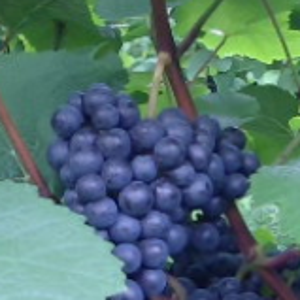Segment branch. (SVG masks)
Masks as SVG:
<instances>
[{"label":"branch","instance_id":"30e6481e","mask_svg":"<svg viewBox=\"0 0 300 300\" xmlns=\"http://www.w3.org/2000/svg\"><path fill=\"white\" fill-rule=\"evenodd\" d=\"M223 2L224 0H214L206 7L202 15L198 17L197 22L194 23L185 34L183 40L176 44L167 16L166 0H148L149 20L155 37V43L157 44V53L165 51L169 54V61L165 65V71L172 86L177 107L187 114L191 122H194L198 118V110L194 106L191 93L183 80L179 60L184 51L189 48L199 35L205 21L209 19L211 14H213Z\"/></svg>","mask_w":300,"mask_h":300},{"label":"branch","instance_id":"325d2c04","mask_svg":"<svg viewBox=\"0 0 300 300\" xmlns=\"http://www.w3.org/2000/svg\"><path fill=\"white\" fill-rule=\"evenodd\" d=\"M225 215L228 217L232 227L239 234L240 246L256 271L260 273L282 297L287 300H296L297 295L293 293L283 281L276 277L268 267H281L286 261L292 262L300 259V248L288 249L283 254L274 257L258 256L256 250L257 241L251 234V230L240 209L237 207V204L233 203L231 207L225 211Z\"/></svg>","mask_w":300,"mask_h":300},{"label":"branch","instance_id":"170604dd","mask_svg":"<svg viewBox=\"0 0 300 300\" xmlns=\"http://www.w3.org/2000/svg\"><path fill=\"white\" fill-rule=\"evenodd\" d=\"M0 118L3 122L5 128L9 132V135L14 143L15 149L17 151V154L19 155L20 159L23 161L25 167L28 169L30 174L33 176L35 181L40 186L43 194L48 197L52 202H54L56 205H59L56 201V199L53 197L52 193L50 192L49 188L47 187L42 175L39 173L38 167L29 153V151L26 149L25 145L23 144L18 132L17 128L11 118V114L9 113V110L7 108L6 103L3 100H0Z\"/></svg>","mask_w":300,"mask_h":300}]
</instances>
